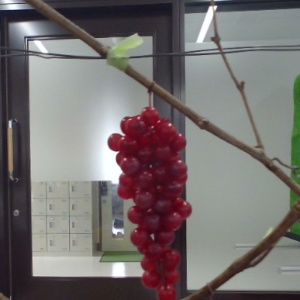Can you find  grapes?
Instances as JSON below:
<instances>
[{"mask_svg":"<svg viewBox=\"0 0 300 300\" xmlns=\"http://www.w3.org/2000/svg\"><path fill=\"white\" fill-rule=\"evenodd\" d=\"M120 129L111 133L107 145L118 151L115 161L123 171L117 193L120 199L135 202L127 217L137 225L130 241L144 254L141 282L146 288L159 287L158 298L176 300L173 285L180 280L182 255L170 246L175 231L193 211L192 204L181 197L190 170L180 159L187 140L155 106H146L137 116H123Z\"/></svg>","mask_w":300,"mask_h":300,"instance_id":"obj_1","label":"grapes"}]
</instances>
